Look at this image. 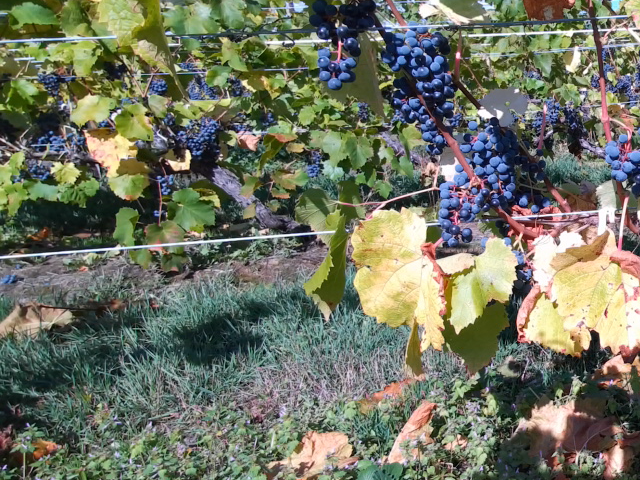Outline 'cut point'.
Masks as SVG:
<instances>
[{
	"mask_svg": "<svg viewBox=\"0 0 640 480\" xmlns=\"http://www.w3.org/2000/svg\"><path fill=\"white\" fill-rule=\"evenodd\" d=\"M522 237H523V233L520 232L518 238L514 242V246H517L519 244V247H522V241H521Z\"/></svg>",
	"mask_w": 640,
	"mask_h": 480,
	"instance_id": "cut-point-1",
	"label": "cut point"
}]
</instances>
